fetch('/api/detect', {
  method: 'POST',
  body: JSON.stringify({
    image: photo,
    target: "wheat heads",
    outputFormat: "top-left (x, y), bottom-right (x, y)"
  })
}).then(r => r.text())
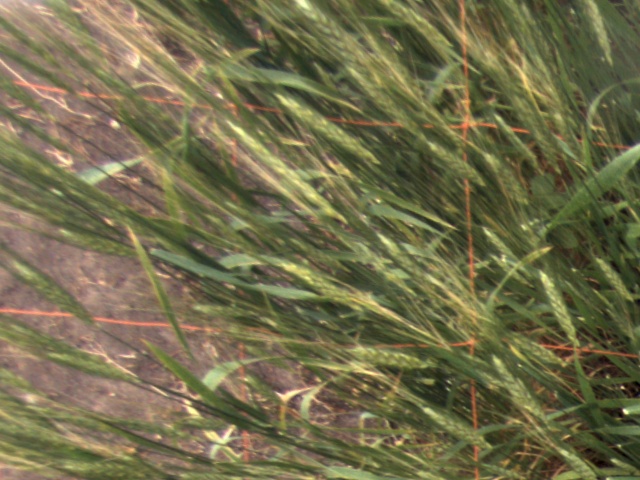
top-left (348, 241), bottom-right (404, 293)
top-left (290, 101), bottom-right (371, 160)
top-left (10, 420), bottom-right (77, 451)
top-left (5, 16), bottom-right (68, 75)
top-left (303, 4), bottom-right (364, 58)
top-left (117, 414), bottom-right (180, 443)
top-left (294, 240), bottom-right (337, 270)
top-left (494, 118), bottom-right (534, 167)
top-left (540, 274), bottom-right (572, 343)
top-left (357, 73), bottom-right (419, 137)
top-left (9, 144), bottom-right (121, 208)
top-left (594, 259), bottom-right (629, 299)
top-left (527, 121), bottom-right (555, 163)
top-left (42, 0), bottom-right (78, 26)
top-left (279, 266), bottom-right (363, 312)
top-left (15, 265), bottom-right (85, 319)
top-left (52, 350), bottom-right (125, 380)
top-left (486, 228), bottom-right (522, 270)
top-left (513, 333), bottom-right (564, 368)
top-left (391, 0), bottom-right (451, 45)
top-left (180, 415), bottom-right (226, 434)
top-left (244, 376), bottom-right (278, 401)
top-left (383, 232), bottom-right (426, 283)
top-left (503, 2), bottom-right (552, 72)
top-left (347, 351), bottom-right (419, 365)
top-left (64, 230), bottom-right (137, 260)
top-left (192, 302), bottom-right (249, 319)
top-left (581, 2), bottom-right (617, 66)
top-left (611, 456), bottom-right (635, 476)
top-left (5, 373), bottom-right (33, 393)
top-left (558, 451), bottom-right (593, 480)
top-left (495, 360), bottom-right (543, 421)
top-left (488, 55), bottom-right (519, 96)
top-left (425, 407), bottom-right (488, 451)
top-left (97, 68), bottom-right (157, 116)
top-left (488, 153), bottom-right (528, 199)
top-left (0, 75), bottom-right (45, 119)
top-left (236, 130), bottom-right (338, 218)
top-left (555, 115), bottom-right (584, 162)
top-left (431, 147), bottom-right (481, 186)
top-left (66, 461), bottom-right (137, 480)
